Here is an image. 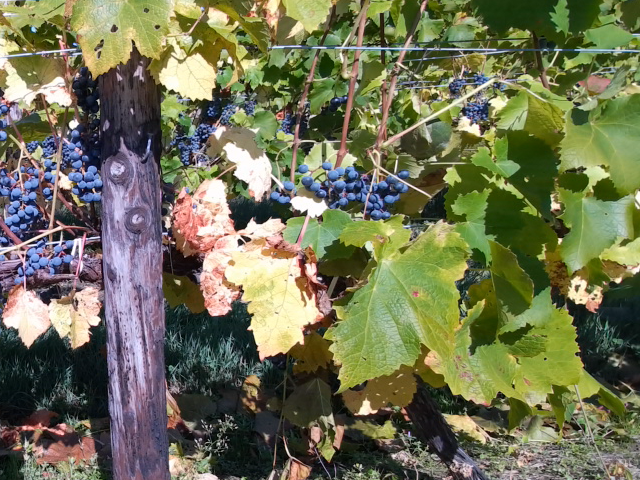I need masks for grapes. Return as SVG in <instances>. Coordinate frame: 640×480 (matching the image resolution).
<instances>
[{
	"label": "grapes",
	"mask_w": 640,
	"mask_h": 480,
	"mask_svg": "<svg viewBox=\"0 0 640 480\" xmlns=\"http://www.w3.org/2000/svg\"><path fill=\"white\" fill-rule=\"evenodd\" d=\"M321 167L326 174L324 183L316 182L311 176H304L301 184L309 193H314L315 197L325 200L329 191L337 196V199L330 201L328 207L335 210L339 206L347 207L350 201H359L361 204L366 202L367 193L368 201L365 213L370 215L374 221L387 220L390 213L387 211V205H392L395 201L401 199V193H406L409 187L399 182L400 179H409L411 174L406 169H401L394 175H388L384 180L378 183L372 182L370 175L360 176L358 170L353 166L336 167L330 161H323Z\"/></svg>",
	"instance_id": "01657485"
},
{
	"label": "grapes",
	"mask_w": 640,
	"mask_h": 480,
	"mask_svg": "<svg viewBox=\"0 0 640 480\" xmlns=\"http://www.w3.org/2000/svg\"><path fill=\"white\" fill-rule=\"evenodd\" d=\"M20 172L29 174L28 180L23 182L25 192L20 187L14 188L20 180L18 172H15L11 177L8 176L6 168L0 169V198L9 197L11 201L8 207V213L11 217H7L4 222L12 233H20L22 230L28 231L30 225L42 217L39 207L35 204L37 189L40 187V171L36 172L32 166H22Z\"/></svg>",
	"instance_id": "b958b902"
},
{
	"label": "grapes",
	"mask_w": 640,
	"mask_h": 480,
	"mask_svg": "<svg viewBox=\"0 0 640 480\" xmlns=\"http://www.w3.org/2000/svg\"><path fill=\"white\" fill-rule=\"evenodd\" d=\"M85 131V126L79 124L71 131L73 137L67 143V147L72 151L69 154L71 160V166L74 169H80L83 165V172L80 171H68L66 178L76 183L72 188V193L78 195L80 201L87 203H99L103 199L101 192H89L84 191L86 189L95 190L102 189L104 187L103 178L98 174L101 169L100 150L94 146H88L85 141L81 139V135Z\"/></svg>",
	"instance_id": "0513c4c2"
},
{
	"label": "grapes",
	"mask_w": 640,
	"mask_h": 480,
	"mask_svg": "<svg viewBox=\"0 0 640 480\" xmlns=\"http://www.w3.org/2000/svg\"><path fill=\"white\" fill-rule=\"evenodd\" d=\"M47 241L48 238L44 237L36 242L39 244L38 248H28V250L26 251L28 260H25L23 262V267L20 266L17 268V276L14 279V283L16 285H19L25 280L24 275L30 276L36 269L48 267L47 272H49L51 275H54L63 263H69L72 261L73 255L71 253L61 254L64 251V247L62 245H56L53 248V252L56 256L52 257L51 259H49L48 257L40 256L39 253H41L46 247Z\"/></svg>",
	"instance_id": "84f90ec7"
},
{
	"label": "grapes",
	"mask_w": 640,
	"mask_h": 480,
	"mask_svg": "<svg viewBox=\"0 0 640 480\" xmlns=\"http://www.w3.org/2000/svg\"><path fill=\"white\" fill-rule=\"evenodd\" d=\"M81 77L78 81H74L71 84V88L77 95V102L81 108H88L93 112L99 111V103L97 99L100 96L97 85L99 80L94 78H88V71L85 66L80 68Z\"/></svg>",
	"instance_id": "f8a65327"
},
{
	"label": "grapes",
	"mask_w": 640,
	"mask_h": 480,
	"mask_svg": "<svg viewBox=\"0 0 640 480\" xmlns=\"http://www.w3.org/2000/svg\"><path fill=\"white\" fill-rule=\"evenodd\" d=\"M44 171H43V180L45 182H50L53 185L55 184V174L51 173V171H55L57 167V163L52 159H46L44 161Z\"/></svg>",
	"instance_id": "5460f4e3"
}]
</instances>
